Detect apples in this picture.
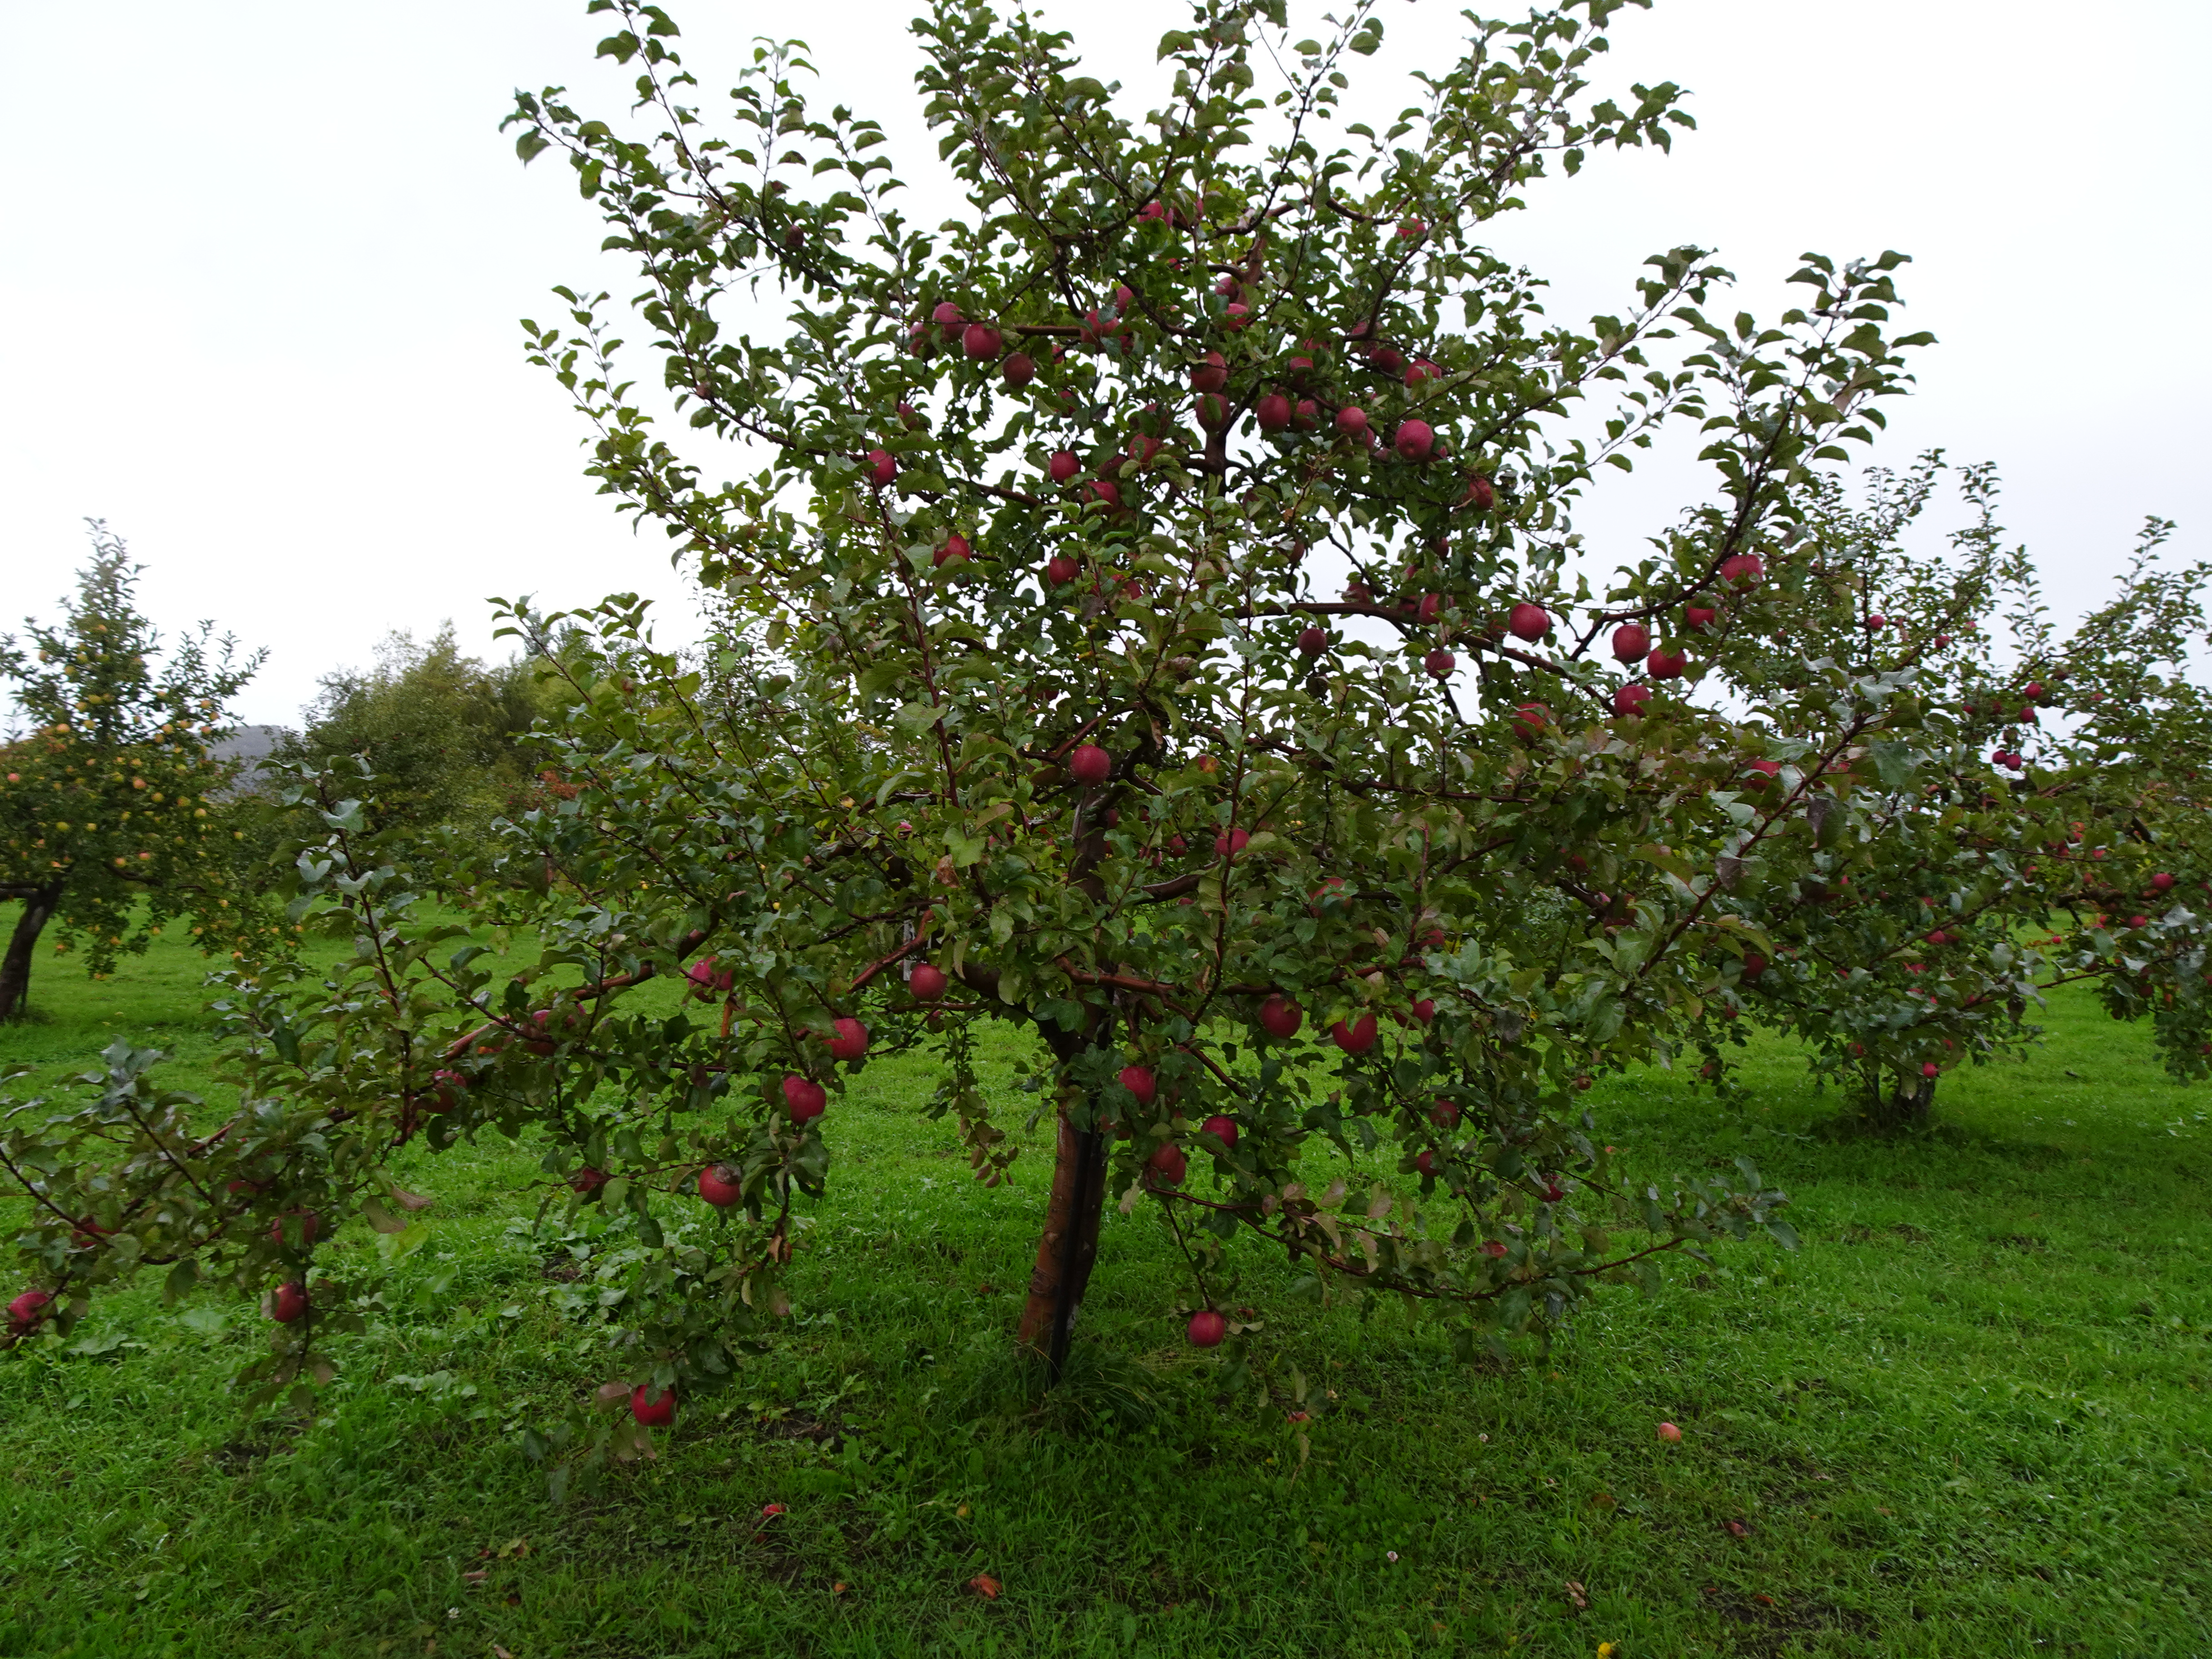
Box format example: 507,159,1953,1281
1373,449,1391,461
1727,1006,1737,1018
1188,1311,1226,1347
1215,828,1250,863
1577,1075,1592,1090
1258,998,1302,1038
1398,595,1421,614
1114,285,1133,317
1405,564,1417,580
1050,451,1081,485
1174,1109,1182,1118
1314,389,1337,404
1735,953,1764,977
1827,761,1854,783
1686,593,1728,635
1138,847,1161,869
1823,874,1848,901
1242,488,1260,521
1083,481,1118,516
1257,394,1290,433
1426,447,1446,463
72,1220,121,1247
573,1169,601,1193
1087,565,1125,596
1280,539,1304,561
1143,404,1169,432
1069,745,1111,788
1721,554,1762,596
886,821,916,850
933,535,970,569
1393,993,1434,1030
927,1011,947,1033
1812,780,1825,788
1463,478,1493,509
1157,256,1181,270
699,1166,741,1207
1179,898,1209,917
909,322,931,358
1346,582,1373,603
1615,685,1650,719
7,1292,56,1336
1272,384,1287,396
1218,303,1249,334
1298,628,1326,656
1358,424,1375,452
1420,592,1454,626
1003,814,1031,838
1105,840,1112,854
394,1062,415,1096
1622,894,1637,918
1481,611,1507,640
1118,1066,1154,1104
1306,674,1328,697
909,963,949,1002
1254,821,1274,832
1150,1153,1186,1186
1430,1100,1458,1129
964,322,1001,362
1165,834,1187,858
632,1383,679,1426
898,961,910,983
525,1010,567,1057
1036,688,1058,701
1303,337,1327,351
1559,847,1587,872
1127,549,1149,560
1332,1005,1377,1054
1159,306,1185,318
1152,1141,1180,1172
1351,321,1388,355
235,1138,272,1166
1174,1046,1193,1080
228,1176,261,1195
894,401,914,432
1081,309,1121,352
1107,810,1118,829
1173,195,1203,227
1186,1035,1196,1045
1432,537,1449,559
823,1018,867,1060
1118,581,1144,599
1046,838,1061,860
1742,760,1781,788
1647,647,1687,681
273,1210,316,1245
1049,555,1078,585
1395,419,1433,461
1055,390,1076,418
932,302,968,343
1296,398,1317,430
783,1078,826,1124
1050,343,1064,364
1703,1064,1713,1079
1613,622,1651,664
1101,1112,1131,1141
1062,873,1068,885
1038,827,1048,834
1405,358,1441,388
1371,347,1403,374
1110,503,1137,525
1477,1240,1508,1258
272,1281,310,1323
988,833,1015,848
428,1070,465,1114
393,1096,415,1130
1215,276,1240,302
1425,649,1455,679
688,957,732,1004
1196,753,1221,774
864,448,896,489
1190,351,1228,394
1196,393,1230,432
1513,704,1549,742
1307,876,1352,920
1129,433,1163,466
1539,1176,1564,1202
566,1003,586,1024
1099,454,1126,478
1139,201,1173,230
1417,1150,1440,1178
1116,325,1134,355
1211,822,1222,833
956,575,971,588
1202,1114,1238,1155
1003,352,1034,389
1289,356,1315,391
1139,805,1150,821
1336,406,1367,438
1164,1087,1179,1104
1418,925,1444,949
1397,217,1425,251
1603,918,1630,940
1510,602,1549,643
